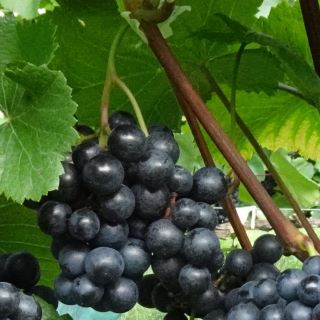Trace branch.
Here are the masks:
<instances>
[{
	"label": "branch",
	"instance_id": "30e6481e",
	"mask_svg": "<svg viewBox=\"0 0 320 320\" xmlns=\"http://www.w3.org/2000/svg\"><path fill=\"white\" fill-rule=\"evenodd\" d=\"M123 2L130 11V20L136 19L139 21V30L146 36L148 47L168 74L171 86L200 149L205 166L215 167V164L201 134L197 119L259 205L276 231L283 247L287 248L291 255H295L303 263L309 256H320L311 239L304 236L280 211L270 194L216 122L163 38L157 23L166 21L170 17L174 10V2L168 3L165 1L159 10L151 4V0H123Z\"/></svg>",
	"mask_w": 320,
	"mask_h": 320
},
{
	"label": "branch",
	"instance_id": "325d2c04",
	"mask_svg": "<svg viewBox=\"0 0 320 320\" xmlns=\"http://www.w3.org/2000/svg\"><path fill=\"white\" fill-rule=\"evenodd\" d=\"M235 120L239 124V126L241 127V129L243 130L244 134L246 135L248 140L251 142L253 147L256 149L257 153L259 154V156L261 157V159L265 163L266 167L268 168V170L270 171V173L274 177L275 181L277 182V184L279 185L281 190L288 197L289 201L291 202L292 206L294 207L295 211L297 212L302 224L306 228L314 248L320 253V240L318 239L317 235L315 234L313 228L311 227L310 223L308 222V220L306 219V217L304 216V214L302 213V211L298 207L297 203L295 202V200L291 196L290 192L286 188V186L283 183V181L281 180L280 176L278 175V173L276 172V170L274 169V167L272 166V164L270 163V161L266 157V155H265L264 151L262 150L260 144L258 143L257 139L254 137L252 132L245 126L244 119L236 111H235Z\"/></svg>",
	"mask_w": 320,
	"mask_h": 320
},
{
	"label": "branch",
	"instance_id": "170604dd",
	"mask_svg": "<svg viewBox=\"0 0 320 320\" xmlns=\"http://www.w3.org/2000/svg\"><path fill=\"white\" fill-rule=\"evenodd\" d=\"M240 178L237 174L232 171L231 182L227 184L228 192L226 196L222 199L226 213L229 215V220L238 236V239L242 245L243 250L252 251L254 247L251 245L243 224L241 223L239 216L233 206V203L229 195L234 191V189L239 185Z\"/></svg>",
	"mask_w": 320,
	"mask_h": 320
},
{
	"label": "branch",
	"instance_id": "45aa463d",
	"mask_svg": "<svg viewBox=\"0 0 320 320\" xmlns=\"http://www.w3.org/2000/svg\"><path fill=\"white\" fill-rule=\"evenodd\" d=\"M210 83L213 86V88L215 89V91L218 94V96L220 97V99L222 100V102L224 103V105L226 106V108L231 113V104L229 103V101L227 100V98L225 97V95L223 94V92L221 91V89L219 88L218 84L216 83V81L214 80L213 77L210 78Z\"/></svg>",
	"mask_w": 320,
	"mask_h": 320
}]
</instances>
